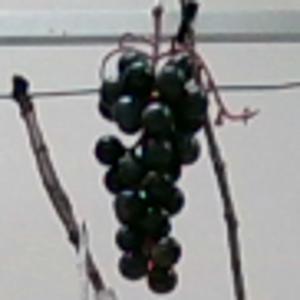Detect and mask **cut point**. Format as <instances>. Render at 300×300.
<instances>
[{
  "label": "cut point",
  "mask_w": 300,
  "mask_h": 300,
  "mask_svg": "<svg viewBox=\"0 0 300 300\" xmlns=\"http://www.w3.org/2000/svg\"><path fill=\"white\" fill-rule=\"evenodd\" d=\"M166 10L164 0H153L150 5L152 16V57L151 63L160 57V46L162 42V14Z\"/></svg>",
  "instance_id": "6a23745f"
}]
</instances>
